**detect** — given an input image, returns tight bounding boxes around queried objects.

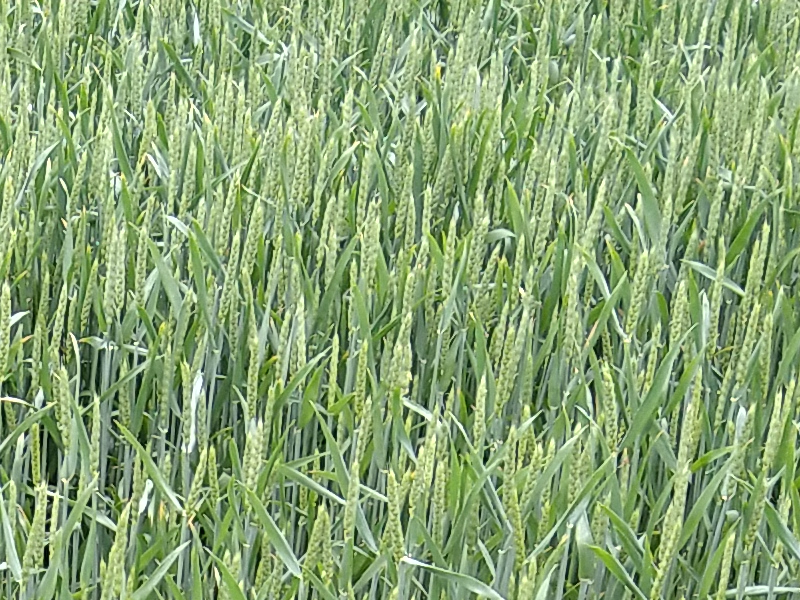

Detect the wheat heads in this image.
[71,0,81,24]
[0,284,12,379]
[431,145,449,214]
[17,35,22,76]
[388,468,407,565]
[664,133,679,201]
[240,197,260,272]
[619,447,631,502]
[746,171,763,222]
[676,15,688,73]
[214,183,224,249]
[2,177,14,226]
[731,8,738,59]
[361,199,376,279]
[753,82,768,149]
[144,196,156,230]
[545,5,551,25]
[659,54,677,96]
[318,21,327,54]
[645,323,661,395]
[393,162,415,239]
[379,469,411,552]
[223,553,240,600]
[292,45,304,116]
[328,334,339,410]
[503,576,514,600]
[380,332,394,381]
[462,126,468,182]
[485,51,496,108]
[588,503,602,542]
[323,38,331,107]
[356,152,369,234]
[412,241,428,297]
[439,325,451,375]
[567,422,584,505]
[231,78,245,176]
[94,131,114,200]
[611,159,625,205]
[23,2,32,58]
[716,369,734,427]
[341,89,353,148]
[632,356,637,374]
[402,345,413,393]
[668,401,680,445]
[307,0,316,35]
[735,304,760,383]
[218,550,231,600]
[511,488,528,569]
[748,144,756,182]
[37,119,44,154]
[10,4,21,51]
[254,459,280,521]
[703,179,723,261]
[574,168,581,212]
[394,312,411,354]
[669,281,686,349]
[380,0,396,37]
[335,22,345,60]
[122,359,132,426]
[58,0,66,50]
[386,345,404,416]
[324,513,333,577]
[686,52,698,89]
[780,68,797,126]
[134,56,143,118]
[99,559,106,588]
[477,141,490,198]
[52,349,63,430]
[778,0,788,26]
[444,121,465,202]
[462,0,483,66]
[271,119,283,198]
[409,375,419,421]
[777,25,789,77]
[370,28,385,87]
[100,7,106,32]
[3,392,17,435]
[354,338,369,418]
[308,449,322,504]
[87,121,104,193]
[514,575,529,600]
[246,20,258,103]
[493,159,506,224]
[571,258,580,274]
[494,47,503,93]
[17,338,24,389]
[422,107,432,173]
[166,170,177,221]
[529,555,538,600]
[242,267,257,335]
[189,198,208,267]
[498,31,508,50]
[35,480,49,564]
[466,195,484,278]
[630,510,641,534]
[463,66,476,113]
[69,150,87,212]
[60,364,72,451]
[660,0,670,43]
[253,560,264,593]
[186,450,208,518]
[229,284,238,365]
[40,314,49,345]
[553,4,562,30]
[401,93,417,165]
[251,71,261,113]
[81,259,99,331]
[218,232,240,325]
[176,82,188,142]
[209,445,219,503]
[749,80,755,112]
[46,89,55,141]
[288,35,297,90]
[23,508,40,579]
[205,126,214,185]
[774,492,792,564]
[134,0,143,38]
[366,217,383,294]
[680,1,688,23]
[395,147,403,197]
[286,116,295,172]
[527,217,536,243]
[521,146,538,208]
[176,6,186,62]
[83,65,90,98]
[131,173,146,219]
[32,324,41,388]
[713,39,731,119]
[216,73,227,132]
[312,153,328,219]
[425,437,436,486]
[761,130,773,192]
[31,422,41,485]
[608,5,618,57]
[359,83,366,104]
[246,156,258,205]
[705,120,719,198]
[260,99,280,165]
[785,103,797,143]
[791,82,800,163]
[637,53,649,133]
[473,374,490,453]
[289,338,298,377]
[169,1,176,40]
[52,33,59,67]
[784,157,793,208]
[0,63,11,120]
[730,131,752,211]
[56,108,63,131]
[81,589,87,600]
[305,46,314,112]
[429,50,436,94]
[29,136,35,172]
[728,84,736,156]
[503,423,518,513]
[758,0,766,33]
[219,170,237,254]
[424,403,438,454]
[795,49,800,68]
[244,420,266,507]
[346,578,358,600]
[574,68,582,93]
[691,367,701,416]
[717,532,736,600]
[669,231,698,314]
[131,448,142,523]
[519,444,546,510]
[219,22,229,68]
[297,295,307,390]
[756,312,774,395]
[221,72,233,154]
[265,236,284,303]
[8,480,16,535]
[522,355,533,406]
[471,215,490,283]
[397,249,404,276]
[26,208,36,282]
[558,6,570,39]
[740,0,752,41]
[118,364,123,423]
[441,215,457,297]
[406,196,416,261]
[787,19,800,74]
[760,164,777,189]
[511,232,524,312]
[299,464,307,509]
[44,2,51,19]
[486,186,494,211]
[789,0,796,22]
[480,78,487,113]
[744,478,769,548]
[493,328,515,415]
[541,436,556,504]
[385,269,395,305]
[645,76,655,125]
[569,94,581,127]
[261,532,270,584]
[277,253,290,302]
[126,565,135,596]
[127,121,133,145]
[627,369,644,416]
[172,287,194,379]
[659,499,675,562]
[580,414,604,473]
[494,298,511,364]
[103,229,117,325]
[684,306,695,370]
[348,259,358,326]
[141,466,148,490]
[524,266,535,310]
[147,158,153,179]
[744,239,758,327]
[558,136,571,190]
[433,460,445,555]
[203,59,209,77]
[102,191,115,246]
[465,493,479,556]
[539,54,550,84]
[753,220,771,303]
[293,3,300,37]
[163,453,172,488]
[214,0,221,31]
[621,586,632,600]
[673,460,691,515]
[650,521,682,600]
[70,41,76,65]
[436,386,455,462]
[109,0,117,25]
[117,71,128,127]
[0,25,5,97]
[261,165,271,200]
[778,204,788,247]
[586,15,602,73]
[534,161,557,256]
[317,196,335,260]
[66,293,77,362]
[648,27,656,74]
[25,63,35,104]
[673,137,702,224]
[602,362,620,458]
[704,68,717,118]
[334,179,344,237]
[190,129,197,146]
[119,12,128,56]
[710,2,721,52]
[37,270,50,324]
[197,390,209,452]
[367,126,378,169]
[523,59,537,135]
[328,0,343,58]
[592,105,613,177]
[449,33,466,105]
[260,9,269,35]
[433,306,444,346]
[181,361,191,443]
[89,89,98,125]
[573,14,585,66]
[656,195,673,272]
[724,313,736,360]
[610,59,618,100]
[393,41,418,109]
[733,82,746,119]
[584,14,597,63]
[402,273,416,323]
[8,123,23,182]
[512,47,520,81]
[90,394,100,475]
[313,97,325,152]
[725,406,757,494]
[470,27,486,66]
[191,339,205,381]
[231,579,244,600]
[209,0,215,32]
[271,531,286,598]
[618,403,632,443]
[669,21,676,45]
[78,45,82,73]
[485,106,501,178]
[198,0,208,35]
[48,490,58,559]
[208,62,215,98]
[625,250,650,339]
[377,35,393,87]
[324,138,336,178]
[534,19,550,88]
[616,83,631,154]
[144,14,159,83]
[97,85,115,133]
[20,86,29,162]
[706,264,723,360]
[169,128,180,170]
[558,64,569,93]
[301,150,309,207]
[98,543,118,600]
[473,113,488,164]
[432,133,438,163]
[728,4,741,25]
[136,225,144,314]
[718,236,726,264]
[76,471,86,522]
[207,204,215,241]
[113,498,131,597]
[722,84,730,156]
[769,9,777,36]
[624,5,634,52]
[495,92,503,109]
[164,73,175,132]
[239,430,253,489]
[456,0,468,31]
[583,249,597,303]
[311,283,321,320]
[444,48,455,87]
[597,57,608,104]
[629,195,643,279]
[581,82,592,115]
[506,310,530,385]
[409,445,424,510]
[204,112,213,133]
[762,388,782,468]
[422,186,432,238]
[41,251,48,284]
[246,208,264,274]
[692,17,708,82]
[750,65,759,117]
[766,133,777,198]
[554,93,568,149]
[795,335,800,408]
[575,189,590,241]
[115,227,126,310]
[644,246,656,291]
[450,0,458,25]
[350,21,357,81]
[537,499,549,544]
[412,48,423,81]
[325,227,336,283]
[678,404,695,462]
[192,39,202,75]
[573,322,582,377]
[619,153,634,186]
[564,274,577,362]
[336,411,345,450]
[176,194,187,246]
[599,493,611,548]
[103,51,112,96]
[740,92,750,128]
[780,377,795,435]
[78,0,87,30]
[736,300,746,351]
[476,241,502,307]
[9,229,17,267]
[247,335,259,421]
[262,386,275,460]
[606,210,625,263]
[42,21,51,69]
[644,163,654,185]
[657,27,662,57]
[303,504,327,579]
[400,417,411,470]
[343,460,360,539]
[528,424,537,460]
[581,177,606,267]
[664,0,677,43]
[292,264,301,302]
[314,0,326,23]
[273,186,285,247]
[517,404,531,464]
[50,280,69,355]
[182,143,198,207]
[64,0,71,48]
[167,304,173,342]
[424,264,438,334]
[533,150,551,213]
[481,28,495,61]
[138,99,155,163]
[290,122,312,204]
[618,77,627,106]
[503,112,511,134]
[242,107,251,156]
[691,0,703,31]
[161,343,171,431]
[721,212,730,239]
[275,308,291,379]
[355,394,373,463]
[537,105,554,168]
[684,87,692,151]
